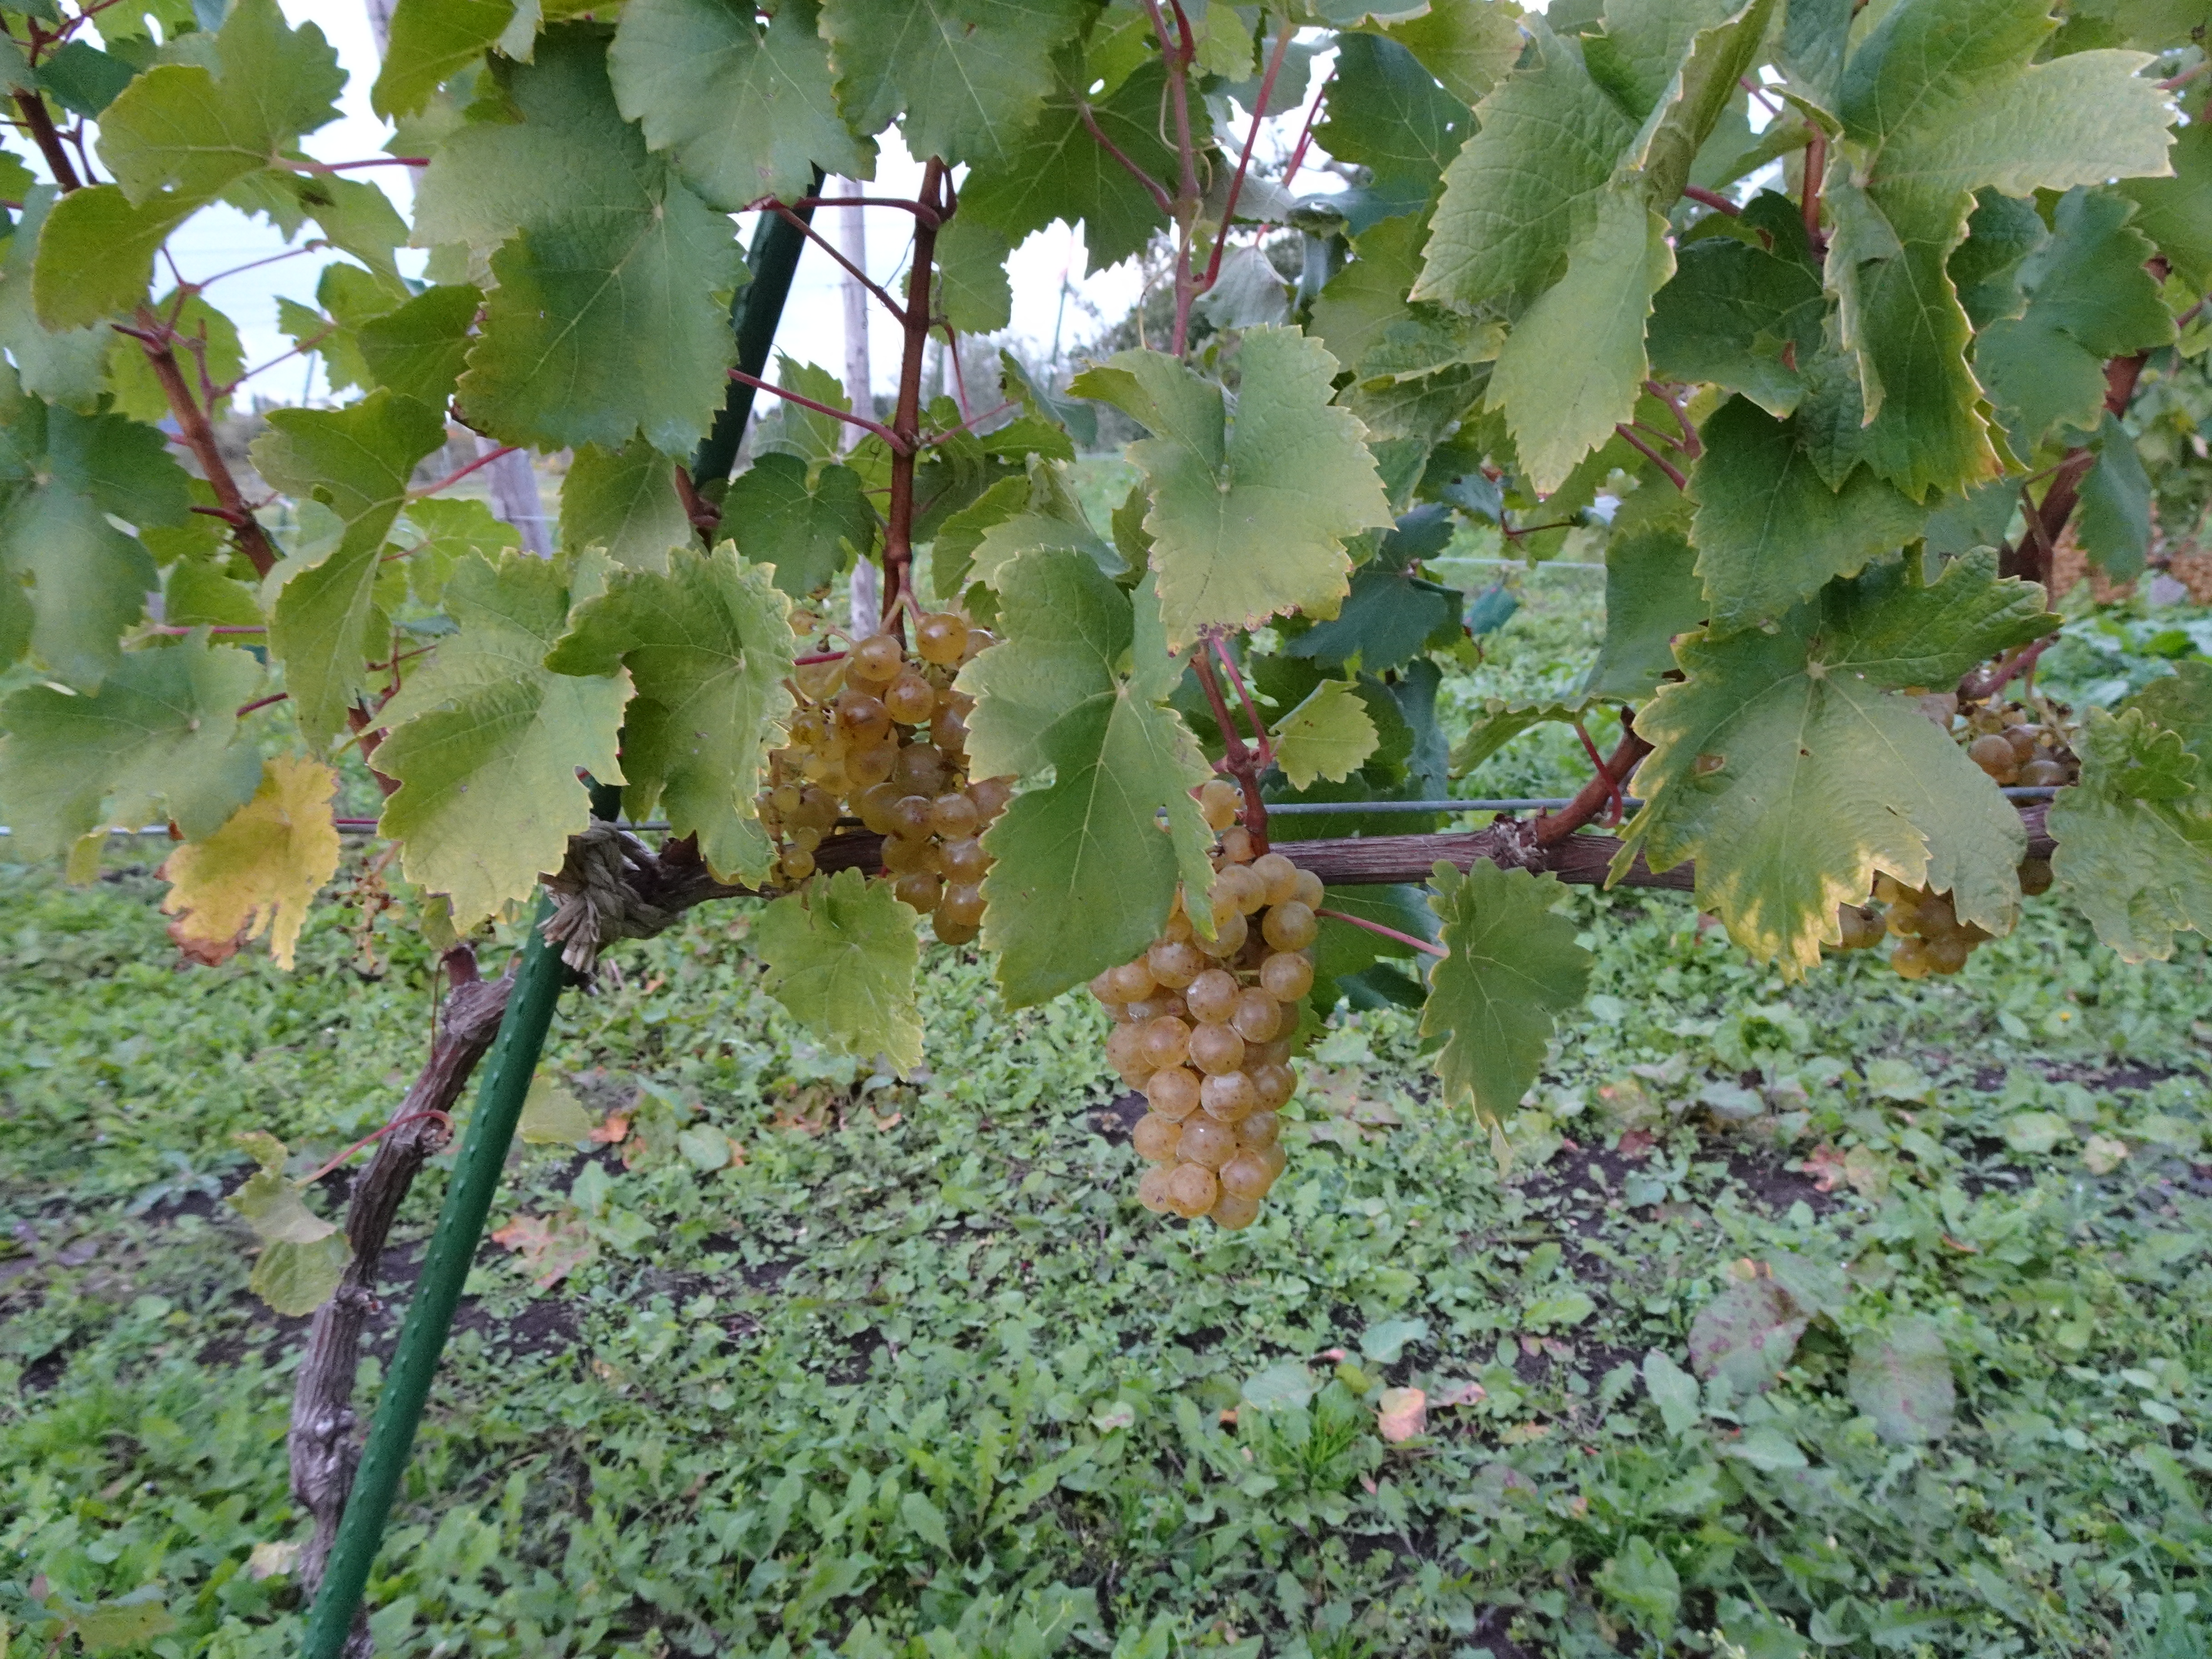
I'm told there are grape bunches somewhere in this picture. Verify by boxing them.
[1087,852,1325,1232]
[1875,872,1998,977]
[1820,893,1902,958]
[867,746,1011,951]
[2050,523,2091,600]
[788,600,993,811]
[2089,568,2145,606]
[1195,780,1261,860]
[1958,697,2093,810]
[751,716,851,886]
[2164,545,2212,610]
